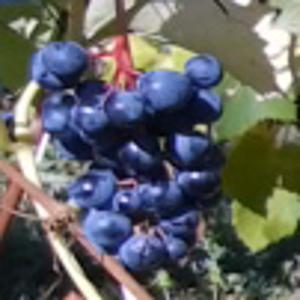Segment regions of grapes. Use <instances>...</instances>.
Segmentation results:
<instances>
[{
    "label": "grapes",
    "mask_w": 300,
    "mask_h": 300,
    "mask_svg": "<svg viewBox=\"0 0 300 300\" xmlns=\"http://www.w3.org/2000/svg\"><path fill=\"white\" fill-rule=\"evenodd\" d=\"M32 82L46 91L43 130L57 152L89 161L67 186L85 211L88 243L144 276L183 258L194 241L198 209L222 200L227 154L196 128L223 116L213 88L224 80L213 52L190 54L183 70L122 67L88 79L93 55L75 41L46 42L27 57Z\"/></svg>",
    "instance_id": "1"
}]
</instances>
